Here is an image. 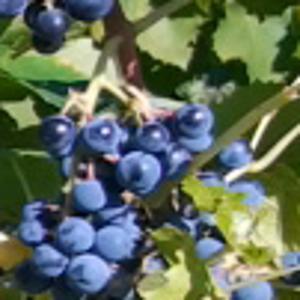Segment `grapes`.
<instances>
[{
    "label": "grapes",
    "mask_w": 300,
    "mask_h": 300,
    "mask_svg": "<svg viewBox=\"0 0 300 300\" xmlns=\"http://www.w3.org/2000/svg\"><path fill=\"white\" fill-rule=\"evenodd\" d=\"M70 205L79 216L55 223L49 203L38 199L21 210L17 240L32 249L13 271L15 290L39 296L60 281L65 293L100 298L115 286L126 267H135L144 254L145 219L132 203L108 190L101 175L76 181Z\"/></svg>",
    "instance_id": "01657485"
},
{
    "label": "grapes",
    "mask_w": 300,
    "mask_h": 300,
    "mask_svg": "<svg viewBox=\"0 0 300 300\" xmlns=\"http://www.w3.org/2000/svg\"><path fill=\"white\" fill-rule=\"evenodd\" d=\"M216 130L215 112L201 103L184 104L172 118H157L136 128L112 115L76 126L68 113H47L37 125L46 155L58 162L63 178L73 177L72 161L81 143L97 157H118L116 186L138 201L153 200L165 181L184 177L194 164V153L214 147Z\"/></svg>",
    "instance_id": "b958b902"
},
{
    "label": "grapes",
    "mask_w": 300,
    "mask_h": 300,
    "mask_svg": "<svg viewBox=\"0 0 300 300\" xmlns=\"http://www.w3.org/2000/svg\"><path fill=\"white\" fill-rule=\"evenodd\" d=\"M116 0H61L42 8L32 0H0V16L25 17L28 29L34 32V44L44 56L58 53L64 47V35L70 28V18L77 22H101L108 18Z\"/></svg>",
    "instance_id": "0513c4c2"
},
{
    "label": "grapes",
    "mask_w": 300,
    "mask_h": 300,
    "mask_svg": "<svg viewBox=\"0 0 300 300\" xmlns=\"http://www.w3.org/2000/svg\"><path fill=\"white\" fill-rule=\"evenodd\" d=\"M168 221L185 234L195 243V257L206 260L219 254L225 248V241L222 238L204 237L201 238V226L207 224V220L201 217H186L183 215L170 216Z\"/></svg>",
    "instance_id": "84f90ec7"
},
{
    "label": "grapes",
    "mask_w": 300,
    "mask_h": 300,
    "mask_svg": "<svg viewBox=\"0 0 300 300\" xmlns=\"http://www.w3.org/2000/svg\"><path fill=\"white\" fill-rule=\"evenodd\" d=\"M253 159V152L245 140L228 143L218 156V164L223 169H244Z\"/></svg>",
    "instance_id": "f8a65327"
},
{
    "label": "grapes",
    "mask_w": 300,
    "mask_h": 300,
    "mask_svg": "<svg viewBox=\"0 0 300 300\" xmlns=\"http://www.w3.org/2000/svg\"><path fill=\"white\" fill-rule=\"evenodd\" d=\"M231 192L247 193L249 196L242 200L244 205H256L260 203L263 197L268 195L267 186L260 180L255 178H245L227 185Z\"/></svg>",
    "instance_id": "5460f4e3"
},
{
    "label": "grapes",
    "mask_w": 300,
    "mask_h": 300,
    "mask_svg": "<svg viewBox=\"0 0 300 300\" xmlns=\"http://www.w3.org/2000/svg\"><path fill=\"white\" fill-rule=\"evenodd\" d=\"M278 292L269 282H255L245 285L232 294V300H277Z\"/></svg>",
    "instance_id": "83cd7487"
},
{
    "label": "grapes",
    "mask_w": 300,
    "mask_h": 300,
    "mask_svg": "<svg viewBox=\"0 0 300 300\" xmlns=\"http://www.w3.org/2000/svg\"><path fill=\"white\" fill-rule=\"evenodd\" d=\"M197 178L206 186L218 187L224 184L223 173L220 170H204L197 175Z\"/></svg>",
    "instance_id": "e5b3c951"
},
{
    "label": "grapes",
    "mask_w": 300,
    "mask_h": 300,
    "mask_svg": "<svg viewBox=\"0 0 300 300\" xmlns=\"http://www.w3.org/2000/svg\"><path fill=\"white\" fill-rule=\"evenodd\" d=\"M171 269L172 265L166 257L155 256L149 260L143 271L149 273L152 271H170Z\"/></svg>",
    "instance_id": "2adb6a1f"
},
{
    "label": "grapes",
    "mask_w": 300,
    "mask_h": 300,
    "mask_svg": "<svg viewBox=\"0 0 300 300\" xmlns=\"http://www.w3.org/2000/svg\"><path fill=\"white\" fill-rule=\"evenodd\" d=\"M280 265L284 269H290L292 267H300V251L293 250L284 253L280 259Z\"/></svg>",
    "instance_id": "ef6de9ee"
}]
</instances>
